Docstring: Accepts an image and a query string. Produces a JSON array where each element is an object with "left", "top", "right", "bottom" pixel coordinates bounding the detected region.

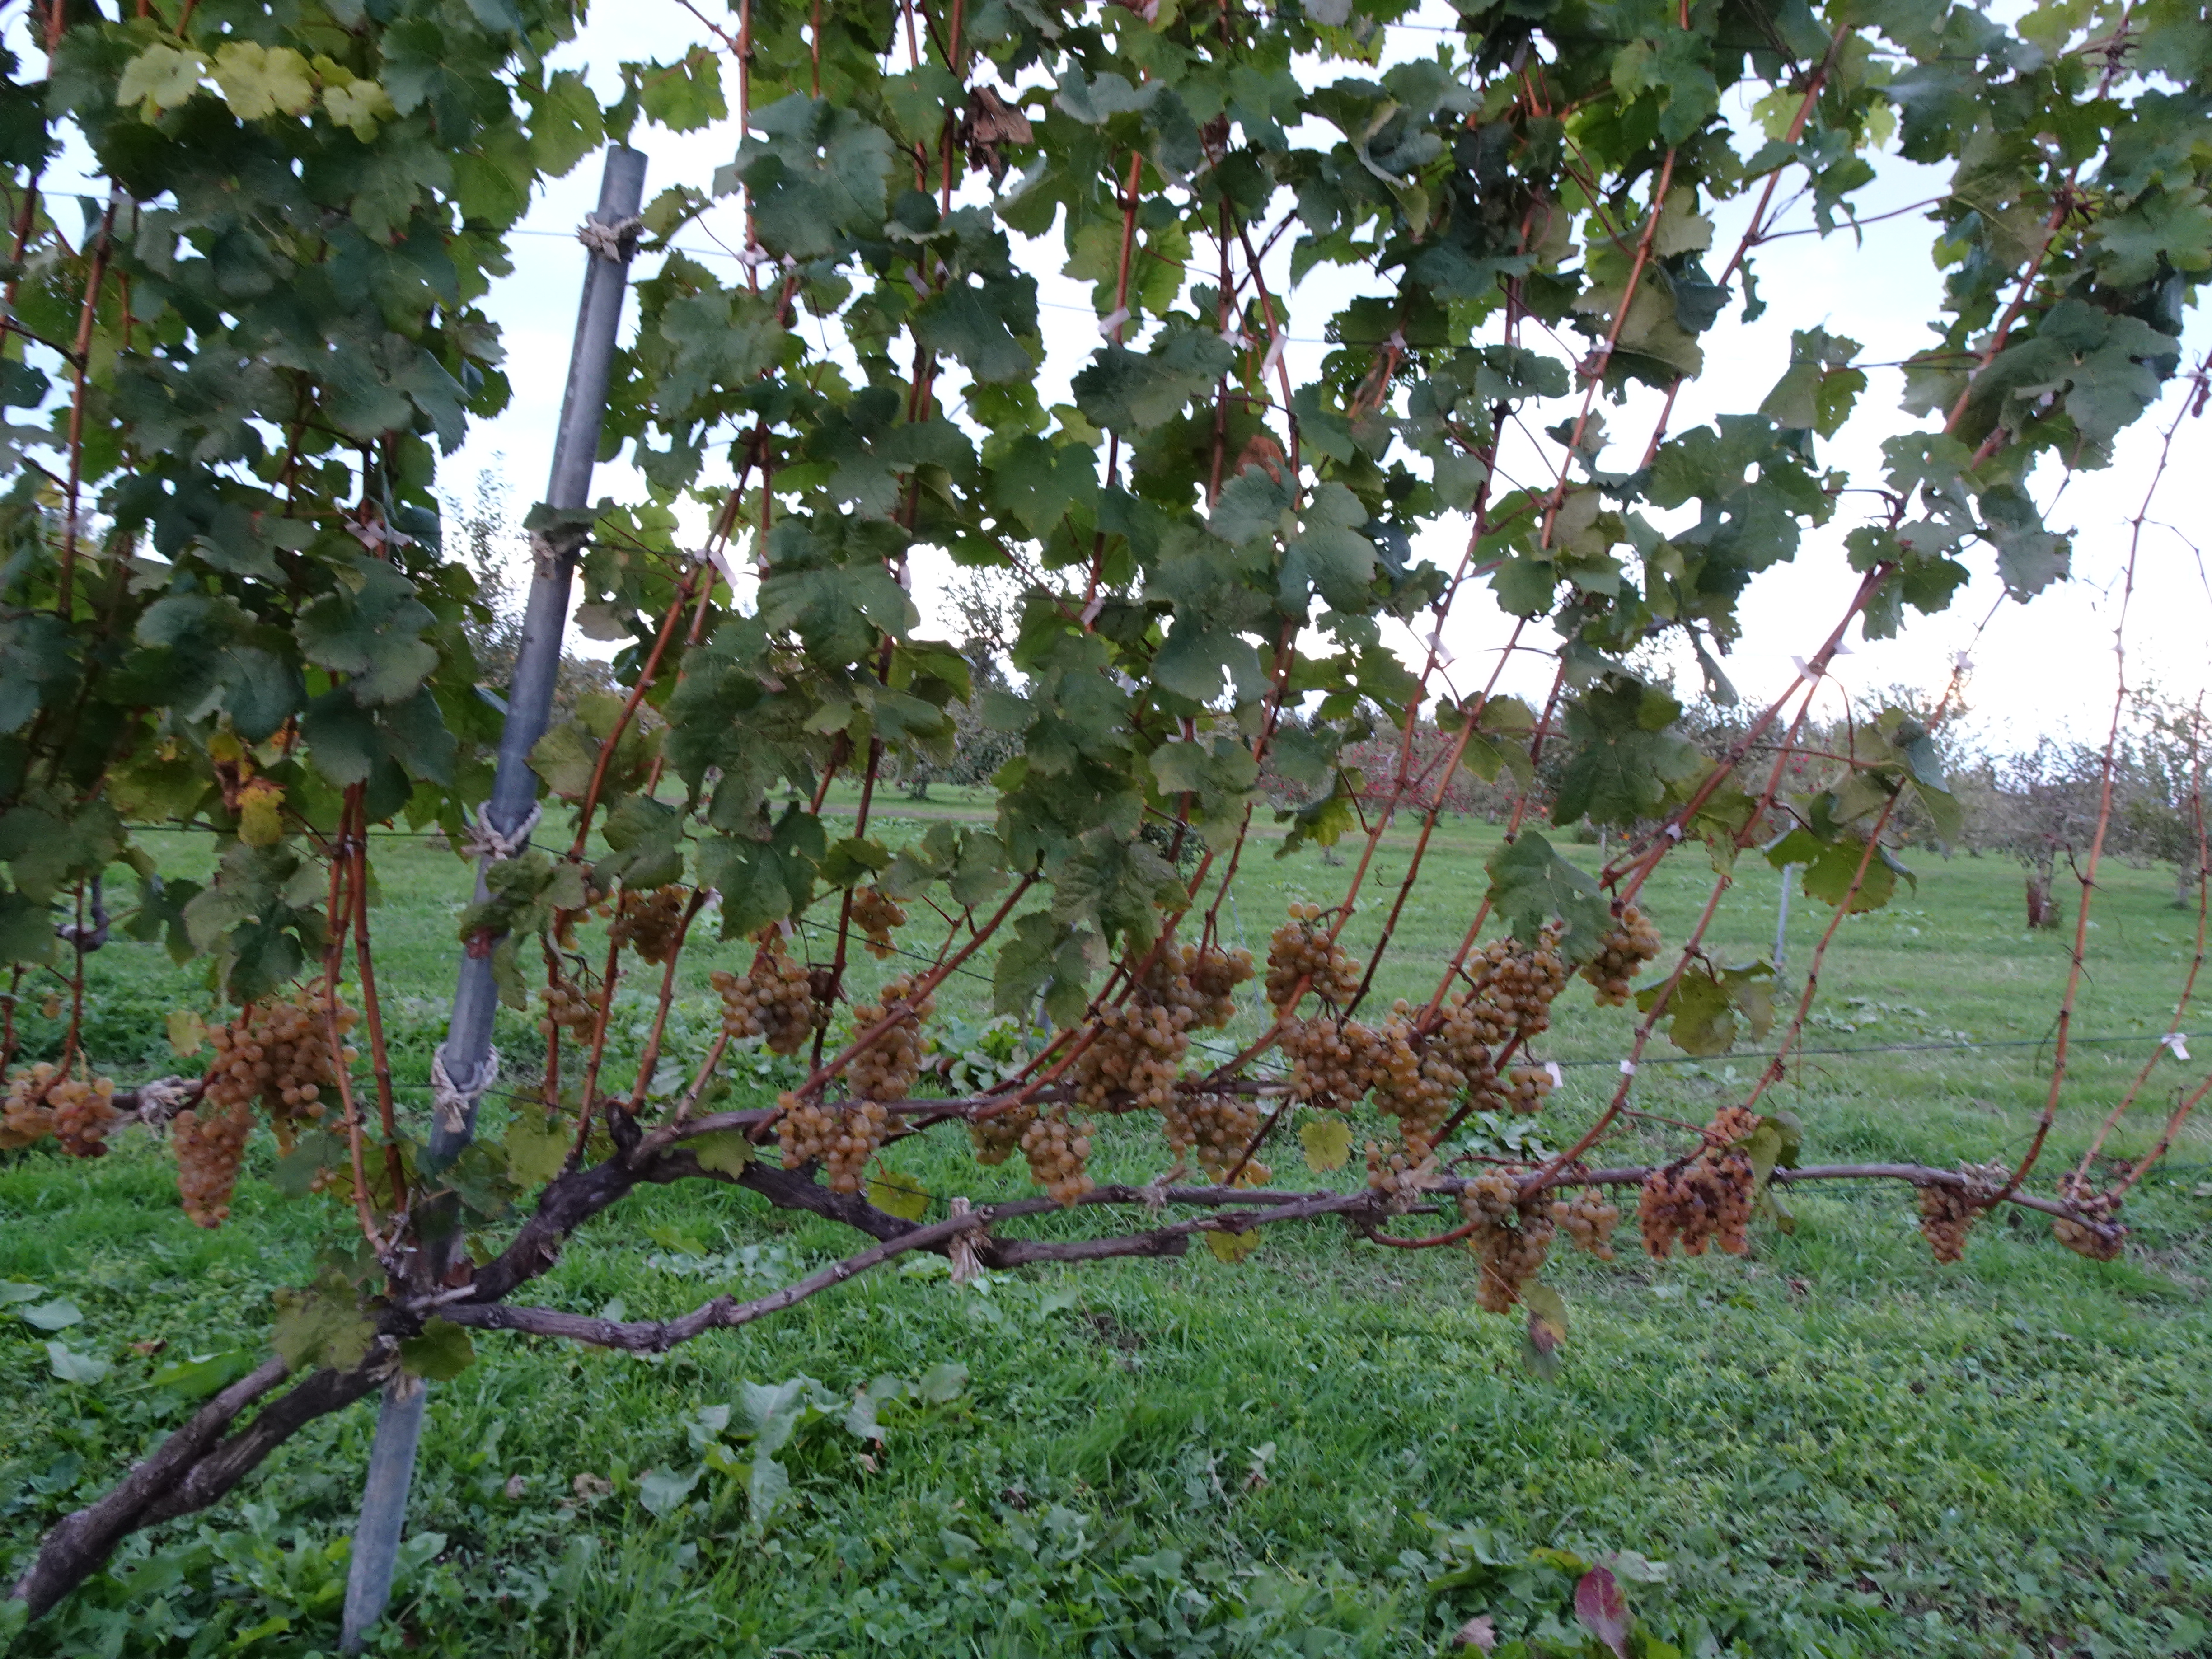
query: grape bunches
[
  {"left": 1276, "top": 1014, "right": 1371, "bottom": 1113},
  {"left": 1577, "top": 906, "right": 1662, "bottom": 1008},
  {"left": 1702, "top": 1157, "right": 1755, "bottom": 1257},
  {"left": 296, "top": 976, "right": 362, "bottom": 1089},
  {"left": 258, "top": 1004, "right": 323, "bottom": 1116},
  {"left": 1121, "top": 914, "right": 1185, "bottom": 1013},
  {"left": 1125, "top": 1002, "right": 1199, "bottom": 1109},
  {"left": 1674, "top": 1167, "right": 1716, "bottom": 1256},
  {"left": 1468, "top": 925, "right": 1566, "bottom": 1038},
  {"left": 1157, "top": 1093, "right": 1202, "bottom": 1154},
  {"left": 46, "top": 1077, "right": 119, "bottom": 1159},
  {"left": 1464, "top": 1165, "right": 1555, "bottom": 1315},
  {"left": 1312, "top": 944, "right": 1363, "bottom": 1005},
  {"left": 877, "top": 970, "right": 936, "bottom": 1066},
  {"left": 966, "top": 1096, "right": 1032, "bottom": 1167},
  {"left": 533, "top": 976, "right": 616, "bottom": 1044},
  {"left": 172, "top": 1110, "right": 247, "bottom": 1228},
  {"left": 1474, "top": 985, "right": 1518, "bottom": 1041},
  {"left": 771, "top": 1089, "right": 844, "bottom": 1172},
  {"left": 1443, "top": 992, "right": 1505, "bottom": 1111},
  {"left": 0, "top": 1062, "right": 60, "bottom": 1149},
  {"left": 1363, "top": 1041, "right": 1430, "bottom": 1114},
  {"left": 750, "top": 922, "right": 832, "bottom": 1056},
  {"left": 848, "top": 1005, "right": 913, "bottom": 1130},
  {"left": 599, "top": 884, "right": 691, "bottom": 966},
  {"left": 2055, "top": 1176, "right": 2121, "bottom": 1260},
  {"left": 848, "top": 885, "right": 909, "bottom": 961},
  {"left": 1378, "top": 994, "right": 1444, "bottom": 1043},
  {"left": 310, "top": 1164, "right": 335, "bottom": 1192},
  {"left": 1915, "top": 1181, "right": 1984, "bottom": 1265},
  {"left": 1021, "top": 1103, "right": 1098, "bottom": 1211},
  {"left": 203, "top": 1004, "right": 273, "bottom": 1125},
  {"left": 264, "top": 1096, "right": 317, "bottom": 1159},
  {"left": 1506, "top": 1063, "right": 1555, "bottom": 1117},
  {"left": 1363, "top": 1140, "right": 1403, "bottom": 1193},
  {"left": 1198, "top": 1093, "right": 1273, "bottom": 1189},
  {"left": 1265, "top": 900, "right": 1324, "bottom": 1004},
  {"left": 1703, "top": 1103, "right": 1761, "bottom": 1160},
  {"left": 1552, "top": 1187, "right": 1620, "bottom": 1261},
  {"left": 1634, "top": 1168, "right": 1681, "bottom": 1265},
  {"left": 709, "top": 969, "right": 773, "bottom": 1036},
  {"left": 1180, "top": 942, "right": 1255, "bottom": 1029},
  {"left": 546, "top": 861, "right": 614, "bottom": 949},
  {"left": 826, "top": 1102, "right": 889, "bottom": 1193},
  {"left": 1399, "top": 1050, "right": 1466, "bottom": 1167},
  {"left": 1072, "top": 997, "right": 1145, "bottom": 1112}
]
